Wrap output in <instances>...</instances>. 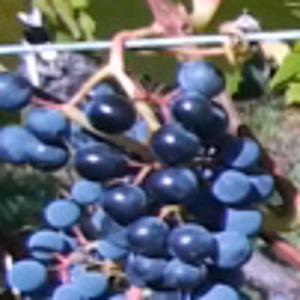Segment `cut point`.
<instances>
[{"mask_svg":"<svg viewBox=\"0 0 300 300\" xmlns=\"http://www.w3.org/2000/svg\"><path fill=\"white\" fill-rule=\"evenodd\" d=\"M161 29L162 27L160 24L153 21L151 26L126 29L113 34L111 36L112 45L108 48L110 61L77 90L73 98V103L75 105H80L88 93L103 82L107 76H113L129 93L131 101L137 111L147 121H153L155 119V114L143 102L137 86L133 84L127 76V61L123 45L125 41H134L139 37L160 36Z\"/></svg>","mask_w":300,"mask_h":300,"instance_id":"obj_1","label":"cut point"}]
</instances>
